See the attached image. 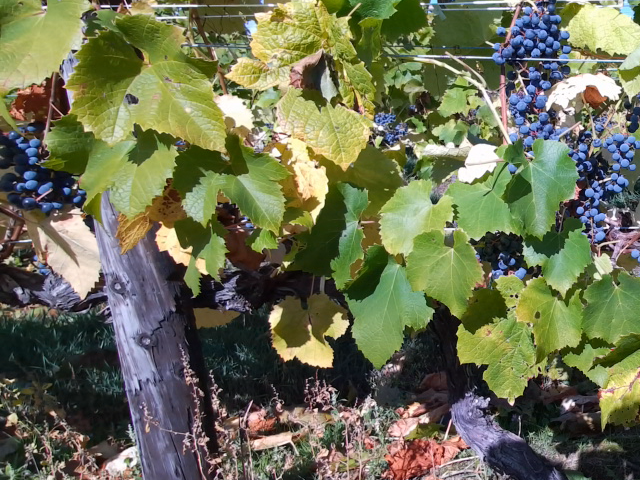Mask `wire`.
Segmentation results:
<instances>
[{
	"label": "wire",
	"instance_id": "obj_5",
	"mask_svg": "<svg viewBox=\"0 0 640 480\" xmlns=\"http://www.w3.org/2000/svg\"><path fill=\"white\" fill-rule=\"evenodd\" d=\"M181 49L184 48H201V49H215V48H229L234 50H251L250 45H236L231 43H213V44H204V43H182L180 45Z\"/></svg>",
	"mask_w": 640,
	"mask_h": 480
},
{
	"label": "wire",
	"instance_id": "obj_3",
	"mask_svg": "<svg viewBox=\"0 0 640 480\" xmlns=\"http://www.w3.org/2000/svg\"><path fill=\"white\" fill-rule=\"evenodd\" d=\"M508 62H548V63H625V58L609 57V58H550V57H508Z\"/></svg>",
	"mask_w": 640,
	"mask_h": 480
},
{
	"label": "wire",
	"instance_id": "obj_4",
	"mask_svg": "<svg viewBox=\"0 0 640 480\" xmlns=\"http://www.w3.org/2000/svg\"><path fill=\"white\" fill-rule=\"evenodd\" d=\"M390 58H439L445 60H458L467 62H477L490 60V55L476 56V55H447L441 53H390Z\"/></svg>",
	"mask_w": 640,
	"mask_h": 480
},
{
	"label": "wire",
	"instance_id": "obj_1",
	"mask_svg": "<svg viewBox=\"0 0 640 480\" xmlns=\"http://www.w3.org/2000/svg\"><path fill=\"white\" fill-rule=\"evenodd\" d=\"M512 0L502 1H448V2H420V7H428L429 11H486V12H514V7H488V6H505L511 4Z\"/></svg>",
	"mask_w": 640,
	"mask_h": 480
},
{
	"label": "wire",
	"instance_id": "obj_2",
	"mask_svg": "<svg viewBox=\"0 0 640 480\" xmlns=\"http://www.w3.org/2000/svg\"><path fill=\"white\" fill-rule=\"evenodd\" d=\"M279 6L278 2L271 4L263 3H206V4H186V3H163L151 4V9L184 8V9H209V8H261L274 9Z\"/></svg>",
	"mask_w": 640,
	"mask_h": 480
}]
</instances>
